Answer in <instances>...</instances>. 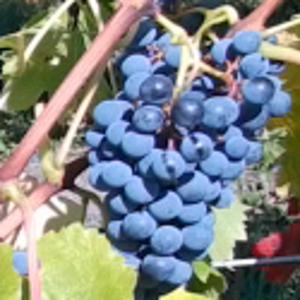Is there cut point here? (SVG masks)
<instances>
[{"label": "cut point", "mask_w": 300, "mask_h": 300, "mask_svg": "<svg viewBox=\"0 0 300 300\" xmlns=\"http://www.w3.org/2000/svg\"><path fill=\"white\" fill-rule=\"evenodd\" d=\"M145 16L159 25L165 26L168 30H171L175 37L181 42L184 57L180 72L176 77V86L178 88L185 86L192 65L198 70L206 68V63L200 59V43L210 24H219L223 21H227V25L232 27L236 22L241 20L238 11L232 4H219L214 10L201 19L190 40V37L184 32L181 26L170 17H166L152 8L147 11Z\"/></svg>", "instance_id": "6a23745f"}]
</instances>
